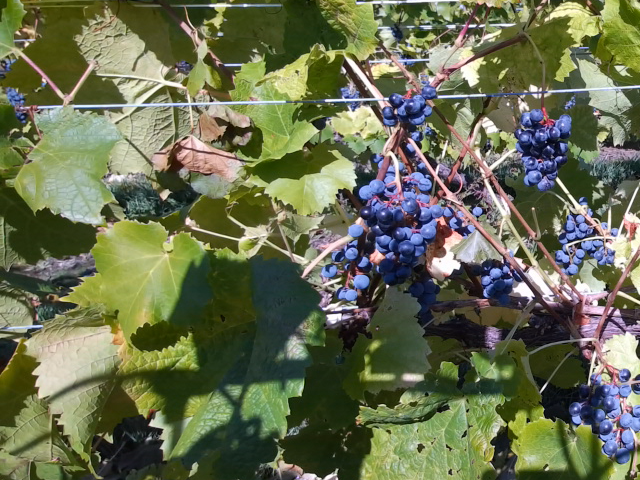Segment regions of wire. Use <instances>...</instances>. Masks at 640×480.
<instances>
[{
	"mask_svg": "<svg viewBox=\"0 0 640 480\" xmlns=\"http://www.w3.org/2000/svg\"><path fill=\"white\" fill-rule=\"evenodd\" d=\"M372 102L379 103L384 102L388 103L389 99L387 97H376V96H368V97H358V98H337V99H307V98H289L285 100H268V99H256V100H247L236 102L232 100H203L197 102H184V101H175V102H157V103H117V102H109V103H82L79 105L72 104L71 108L74 110H82V109H103V108H112V109H124V108H159V107H200L206 105H229L234 107H243L250 105H258V104H266V105H287L291 103H305V104H339V103H360V102Z\"/></svg>",
	"mask_w": 640,
	"mask_h": 480,
	"instance_id": "obj_1",
	"label": "wire"
},
{
	"mask_svg": "<svg viewBox=\"0 0 640 480\" xmlns=\"http://www.w3.org/2000/svg\"><path fill=\"white\" fill-rule=\"evenodd\" d=\"M622 89L629 90H638L640 89V84L632 85V84H619L614 86H586V87H575V88H549V89H540V90H528V91H488L484 93L478 94H467V93H452L448 95H436L437 100H451L455 98H465V99H480L486 97L497 98L498 96H530V95H542V94H551V93H572L576 94L578 92H588V91H616Z\"/></svg>",
	"mask_w": 640,
	"mask_h": 480,
	"instance_id": "obj_2",
	"label": "wire"
},
{
	"mask_svg": "<svg viewBox=\"0 0 640 480\" xmlns=\"http://www.w3.org/2000/svg\"><path fill=\"white\" fill-rule=\"evenodd\" d=\"M19 109L20 110H30V111H41V110H45V109L62 110L63 106L62 105H53V104H43V105H39V106L20 105Z\"/></svg>",
	"mask_w": 640,
	"mask_h": 480,
	"instance_id": "obj_3",
	"label": "wire"
}]
</instances>
